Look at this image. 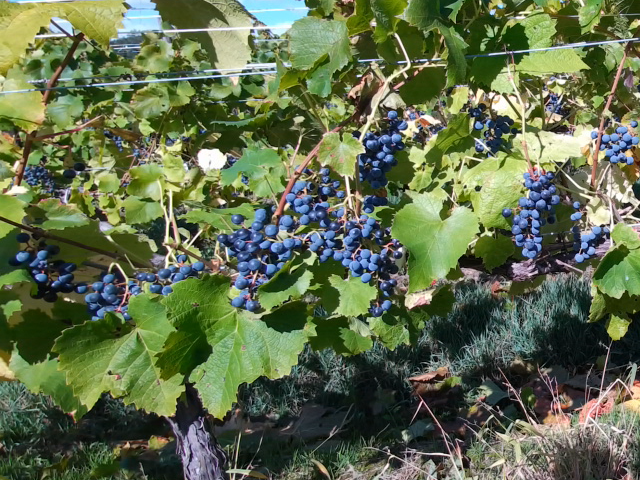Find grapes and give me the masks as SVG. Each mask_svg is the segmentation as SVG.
<instances>
[{
    "label": "grapes",
    "mask_w": 640,
    "mask_h": 480,
    "mask_svg": "<svg viewBox=\"0 0 640 480\" xmlns=\"http://www.w3.org/2000/svg\"><path fill=\"white\" fill-rule=\"evenodd\" d=\"M513 124L514 120L508 115H504L503 117L501 115H497L495 117V121L493 119H487L484 122L480 120H477L475 122L474 129L476 131H483L486 128V130L483 132L484 139H479V141L481 143H484V140H488L485 142V146L487 148H490V151L492 153L488 151L486 153L487 157H492L493 154H496L502 149L504 140L501 137L503 136V133L508 134L510 132L512 135H516L518 133V130L516 128H512L510 130V128L507 126H512Z\"/></svg>",
    "instance_id": "grapes-6"
},
{
    "label": "grapes",
    "mask_w": 640,
    "mask_h": 480,
    "mask_svg": "<svg viewBox=\"0 0 640 480\" xmlns=\"http://www.w3.org/2000/svg\"><path fill=\"white\" fill-rule=\"evenodd\" d=\"M128 290L130 294L133 296H137L141 293V288L139 287V284L134 280L129 281Z\"/></svg>",
    "instance_id": "grapes-12"
},
{
    "label": "grapes",
    "mask_w": 640,
    "mask_h": 480,
    "mask_svg": "<svg viewBox=\"0 0 640 480\" xmlns=\"http://www.w3.org/2000/svg\"><path fill=\"white\" fill-rule=\"evenodd\" d=\"M525 187L529 190L527 197H520L517 204L523 210L518 215H513L511 221V233L515 235V246L522 248L521 256L528 259H536L542 254L544 238L539 235L540 228L547 223L554 224L557 214L554 206L561 203V198L556 194V185L551 183L554 178L552 171L540 175L538 181L524 173Z\"/></svg>",
    "instance_id": "grapes-3"
},
{
    "label": "grapes",
    "mask_w": 640,
    "mask_h": 480,
    "mask_svg": "<svg viewBox=\"0 0 640 480\" xmlns=\"http://www.w3.org/2000/svg\"><path fill=\"white\" fill-rule=\"evenodd\" d=\"M387 204L388 200L385 197L368 195L364 198L362 211L365 214H372L374 212V207L379 208L380 206H386Z\"/></svg>",
    "instance_id": "grapes-9"
},
{
    "label": "grapes",
    "mask_w": 640,
    "mask_h": 480,
    "mask_svg": "<svg viewBox=\"0 0 640 480\" xmlns=\"http://www.w3.org/2000/svg\"><path fill=\"white\" fill-rule=\"evenodd\" d=\"M593 232H590L589 234H580V228L579 227H572L571 228V232L574 235V240L576 242H574V247L573 250L574 251H580L581 249H584L583 252L579 253H575L574 254V259L576 261L577 264H583L585 262V259H591L592 255L595 253V246H596V242L599 240V236L604 233L609 235L610 231L606 228V227H602L601 225H596L592 228Z\"/></svg>",
    "instance_id": "grapes-8"
},
{
    "label": "grapes",
    "mask_w": 640,
    "mask_h": 480,
    "mask_svg": "<svg viewBox=\"0 0 640 480\" xmlns=\"http://www.w3.org/2000/svg\"><path fill=\"white\" fill-rule=\"evenodd\" d=\"M127 311H128V304L124 303L121 306L120 314L124 317L125 321L132 322L134 320V317L132 315H130L129 313H127Z\"/></svg>",
    "instance_id": "grapes-13"
},
{
    "label": "grapes",
    "mask_w": 640,
    "mask_h": 480,
    "mask_svg": "<svg viewBox=\"0 0 640 480\" xmlns=\"http://www.w3.org/2000/svg\"><path fill=\"white\" fill-rule=\"evenodd\" d=\"M149 292L155 293V294H161L162 296H168L169 294L173 293V290L171 289L170 285H165L163 287L162 284L153 283L152 285L149 286Z\"/></svg>",
    "instance_id": "grapes-11"
},
{
    "label": "grapes",
    "mask_w": 640,
    "mask_h": 480,
    "mask_svg": "<svg viewBox=\"0 0 640 480\" xmlns=\"http://www.w3.org/2000/svg\"><path fill=\"white\" fill-rule=\"evenodd\" d=\"M628 127H616L615 133L602 134V141L599 151L605 150V155L609 158L610 164L626 163L628 166L634 164L633 157H627L625 153L632 149L633 145L640 143L639 137H633L627 133Z\"/></svg>",
    "instance_id": "grapes-5"
},
{
    "label": "grapes",
    "mask_w": 640,
    "mask_h": 480,
    "mask_svg": "<svg viewBox=\"0 0 640 480\" xmlns=\"http://www.w3.org/2000/svg\"><path fill=\"white\" fill-rule=\"evenodd\" d=\"M386 117L389 119L386 133L367 132L363 138L366 153L357 156L359 181L364 183L368 179L372 189L388 185L386 172H391L398 165L394 154L405 149L400 131H406L409 125L398 119L394 110H389Z\"/></svg>",
    "instance_id": "grapes-4"
},
{
    "label": "grapes",
    "mask_w": 640,
    "mask_h": 480,
    "mask_svg": "<svg viewBox=\"0 0 640 480\" xmlns=\"http://www.w3.org/2000/svg\"><path fill=\"white\" fill-rule=\"evenodd\" d=\"M392 307V302L390 300H384L379 306L373 304L369 309L371 315L375 318H380L384 312H387Z\"/></svg>",
    "instance_id": "grapes-10"
},
{
    "label": "grapes",
    "mask_w": 640,
    "mask_h": 480,
    "mask_svg": "<svg viewBox=\"0 0 640 480\" xmlns=\"http://www.w3.org/2000/svg\"><path fill=\"white\" fill-rule=\"evenodd\" d=\"M60 253L58 245H47L45 241H39L37 252L34 251H16L14 255L8 259L9 266L23 265L25 262L31 269V278L37 285V294L31 296L32 300L42 299L47 303H54L58 300L56 293L68 294L74 292L76 294H85L84 302L87 304V312L94 316L92 321L103 320L105 314L120 308L123 302L122 295L125 292L124 286H115L111 284L118 280L125 283L126 279L119 270H115L113 274H107L106 271L101 273V281H92L89 286L86 283H79L76 286L72 283L75 280L77 270L76 263H66L63 260H45ZM58 273L57 281L51 280L49 283L48 273Z\"/></svg>",
    "instance_id": "grapes-2"
},
{
    "label": "grapes",
    "mask_w": 640,
    "mask_h": 480,
    "mask_svg": "<svg viewBox=\"0 0 640 480\" xmlns=\"http://www.w3.org/2000/svg\"><path fill=\"white\" fill-rule=\"evenodd\" d=\"M188 259L187 255L177 254L175 260L179 264L186 263ZM205 267V263L202 261H195L192 265L183 264L180 268L175 266H169L167 269H159L155 273H147L139 270L136 272V280L139 282L146 281L147 283L155 282L157 277L160 280L171 279L172 283H179L180 281L197 277L198 271H202Z\"/></svg>",
    "instance_id": "grapes-7"
},
{
    "label": "grapes",
    "mask_w": 640,
    "mask_h": 480,
    "mask_svg": "<svg viewBox=\"0 0 640 480\" xmlns=\"http://www.w3.org/2000/svg\"><path fill=\"white\" fill-rule=\"evenodd\" d=\"M318 174L321 176V181L328 186H322L317 189V194L320 196L312 197L311 195L303 196L301 199L297 198V194L305 189L308 193H312L316 189V185L311 181H297L291 188V192L287 194L285 202L290 205V209L295 214H302L298 221H294L292 215H280L277 224L268 223L265 225L267 219V210L265 208H257L254 211V221L251 223V228L241 227L238 228L231 235L219 234L217 236V242L222 247H228L227 254L230 257H236V271L239 275L234 280V287L236 290H242L236 297L231 300L233 308H242L247 312H253L259 307V302L255 300H248L246 297L250 294V290L253 286L254 279H244L250 275V272H258L263 274V277L255 280V286L259 287L265 282H269L271 278L281 270L285 265V261L292 258L293 249H300L303 245L304 239L308 236L307 232H303L300 235L295 234L293 238H284L280 242L263 241L264 235L268 239H274L279 232L290 231L294 233L300 225H311L312 223H318L319 228H327L319 232V236L313 233L309 236V249L312 252H318L320 247L321 255L319 256V263L324 264L329 260V257L333 261H340V265L347 268L350 272V276L359 278L362 284H368L372 281L373 276L370 273H364V270H368L371 273H377L378 277L385 281L378 284V288L382 291L384 297L390 298L395 293V287L397 281L391 279L389 274L397 275L399 273V267L392 263L388 258L391 255V251L387 245V241L383 237L391 235V227L387 226L385 232L380 229L377 224V219L374 216L359 215V224L356 220H347L345 222V228L347 230L346 236L343 237V246L345 251L333 250L338 246V241L335 240L336 231H339L343 226L342 222H336L329 219L328 210L330 209V203L327 201L329 197H336L338 199H344L346 192L344 190H338L341 187V181L339 179H332L330 177L331 170L329 168L318 170ZM374 231L375 243L381 249L379 255H372L368 248L360 249L355 260L352 258L353 253L356 252L360 245L361 238L364 240H371L373 238L372 232ZM260 250H269L273 254L275 260H280V263H273L263 265L261 262L266 263L269 258V254H262L260 261L257 259V253Z\"/></svg>",
    "instance_id": "grapes-1"
}]
</instances>
